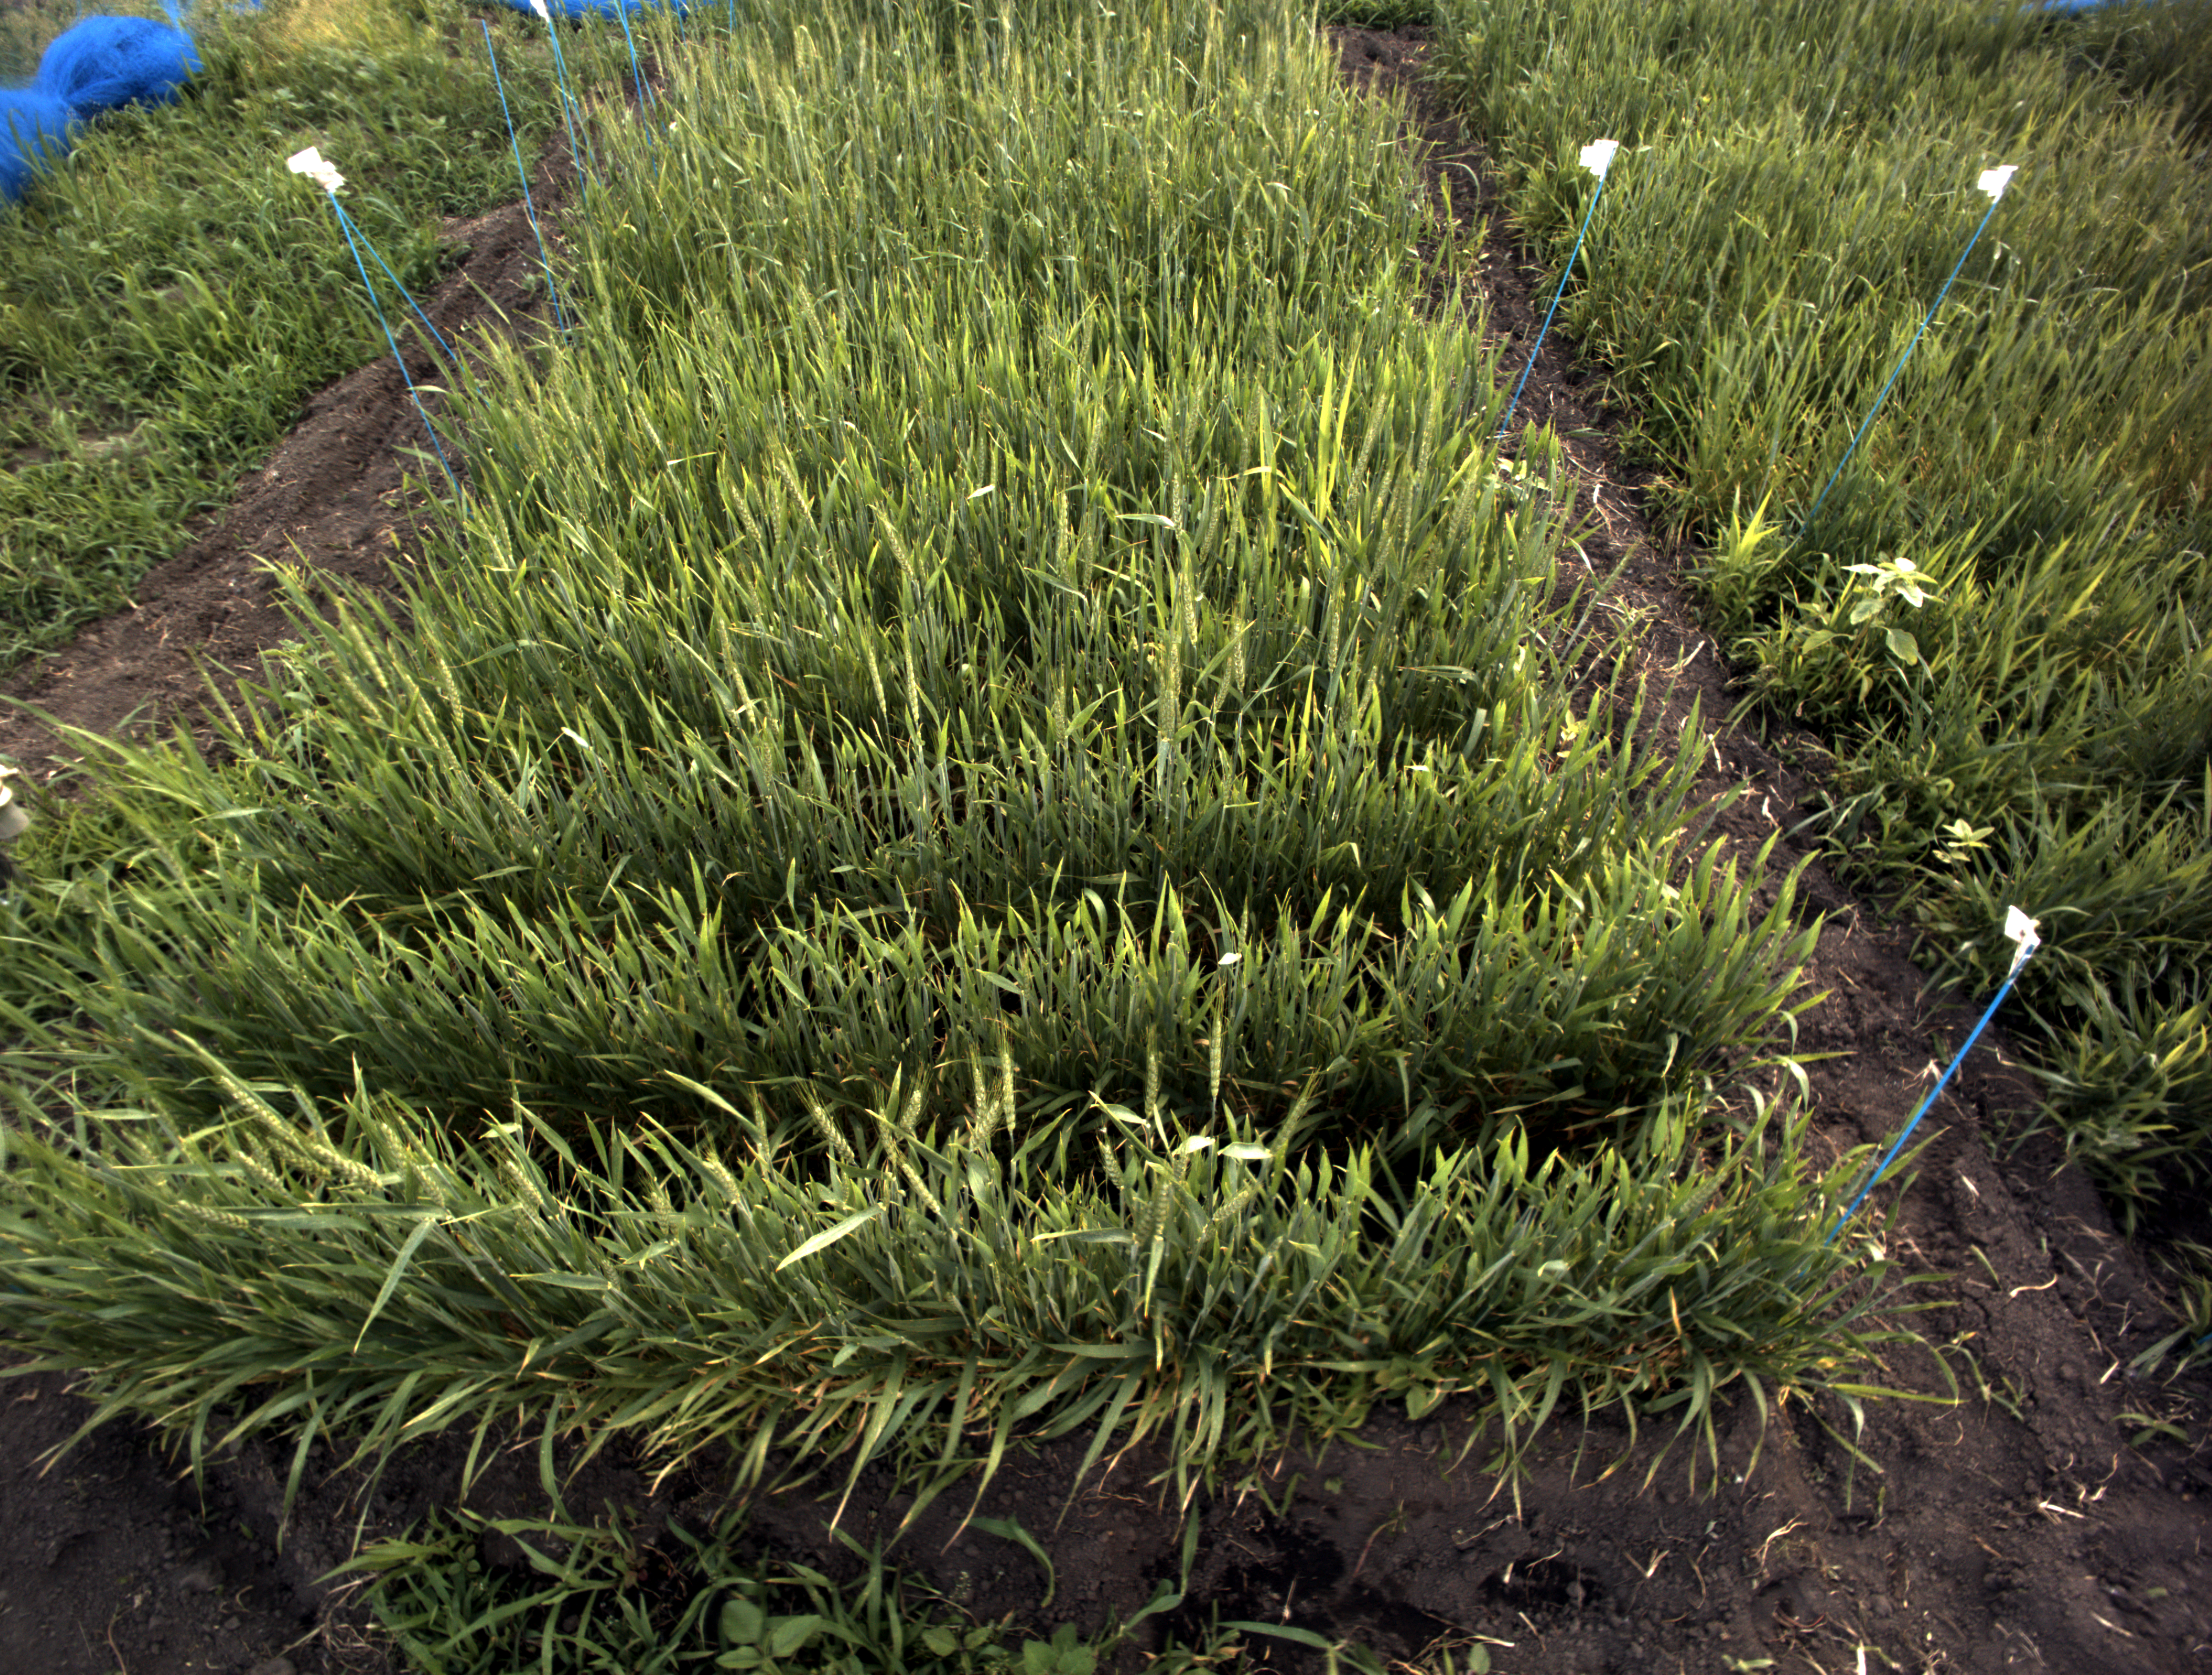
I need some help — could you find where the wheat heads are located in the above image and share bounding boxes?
[1287,140,1293,168]
[777,457,813,524]
[824,225,837,254]
[1247,165,1258,190]
[512,1208,535,1244]
[1360,665,1378,721]
[903,650,920,722]
[994,353,1000,380]
[1400,300,1409,322]
[1083,416,1102,475]
[1075,27,1083,67]
[809,63,819,103]
[786,84,801,127]
[859,38,868,72]
[316,1144,384,1191]
[1334,692,1353,744]
[792,208,804,229]
[1235,908,1249,955]
[334,1289,375,1310]
[774,90,791,131]
[1168,642,1183,699]
[1049,406,1057,437]
[1053,693,1066,743]
[1082,534,1093,591]
[1266,309,1277,365]
[1184,385,1200,448]
[592,96,605,123]
[1222,771,1233,808]
[722,699,738,728]
[1158,671,1167,733]
[1276,6,1284,27]
[504,1158,545,1208]
[1551,664,1570,692]
[1236,437,1249,486]
[618,89,626,110]
[1101,602,1109,639]
[1212,1191,1250,1225]
[978,438,985,484]
[1302,151,1315,186]
[752,482,770,527]
[2145,117,2173,154]
[1263,226,1269,253]
[865,148,878,183]
[1203,76,1208,109]
[705,59,718,96]
[651,40,663,76]
[875,1106,898,1163]
[706,1156,743,1202]
[1512,525,1529,581]
[411,1166,443,1205]
[896,195,907,225]
[678,129,687,155]
[1214,656,1232,710]
[803,144,811,170]
[760,741,773,789]
[645,179,665,214]
[1320,58,1330,100]
[1270,1097,1308,1155]
[1370,470,1392,526]
[490,492,514,557]
[817,55,829,92]
[834,402,841,437]
[556,387,577,435]
[515,394,536,426]
[120,1129,163,1180]
[562,555,574,586]
[663,47,667,70]
[870,43,878,87]
[767,73,775,99]
[950,363,957,395]
[1016,68,1025,109]
[1308,6,1321,57]
[1678,1168,1731,1220]
[1153,1180,1171,1237]
[605,128,621,161]
[2156,227,2180,263]
[149,1095,185,1149]
[1025,76,1034,116]
[638,405,661,447]
[852,777,858,807]
[436,733,463,768]
[713,314,724,368]
[599,1259,622,1289]
[341,670,382,723]
[1039,365,1049,399]
[688,138,698,162]
[1199,505,1223,563]
[1078,314,1092,365]
[882,519,913,582]
[691,11,701,39]
[732,104,751,135]
[801,759,812,795]
[744,45,756,82]
[2105,212,2131,246]
[1164,678,1176,740]
[712,206,730,239]
[516,1197,538,1219]
[549,333,565,390]
[1890,216,1901,239]
[917,557,927,587]
[1346,429,1376,513]
[756,88,769,121]
[584,369,593,421]
[751,1,764,20]
[649,1188,670,1234]
[1392,573,1414,616]
[1415,400,1441,480]
[1714,257,1726,286]
[1173,154,1182,183]
[216,1073,288,1137]
[837,362,844,398]
[907,79,913,111]
[827,14,842,60]
[2010,225,2019,248]
[485,778,528,820]
[1366,84,1376,126]
[1000,1053,1020,1135]
[397,1115,439,1170]
[840,1171,850,1201]
[1473,330,1481,367]
[2067,328,2077,355]
[845,177,857,203]
[593,259,603,284]
[1034,744,1043,770]
[665,41,676,80]
[835,277,848,335]
[1527,534,1562,591]
[730,667,757,725]
[1169,210,1178,238]
[848,200,860,233]
[1133,1201,1156,1244]
[1227,83,1238,115]
[716,615,736,676]
[1395,101,1405,125]
[1146,204,1151,228]
[902,1161,941,1217]
[1342,353,1353,399]
[586,721,600,757]
[538,424,554,467]
[928,207,940,237]
[379,1122,409,1180]
[663,1200,678,1235]
[1022,965,1032,1002]
[243,1130,275,1175]
[1261,65,1277,96]
[1057,685,1065,713]
[478,518,510,580]
[1102,1141,1125,1189]
[1372,393,1387,438]
[1266,1235,1284,1258]
[1585,554,1629,616]
[1145,1050,1159,1119]
[1163,417,1174,467]
[731,485,762,542]
[729,61,740,105]
[760,70,766,102]
[768,491,782,546]
[674,62,684,90]
[405,674,437,724]
[1192,67,1205,109]
[800,210,811,229]
[607,116,630,165]
[1231,625,1247,691]
[972,215,984,241]
[2150,140,2167,164]
[1100,14,1110,47]
[831,556,844,598]
[1541,578,1555,618]
[686,50,698,88]
[1394,475,1413,548]
[999,14,1011,77]
[1045,323,1056,371]
[664,8,674,45]
[813,167,830,200]
[1247,543,1262,599]
[955,44,966,83]
[1447,483,1470,539]
[765,4,773,25]
[1277,209,1285,230]
[750,169,757,193]
[1174,1146,1188,1182]
[1163,143,1169,163]
[415,714,441,749]
[549,551,562,575]
[970,1100,999,1143]
[1308,218,1319,247]
[1245,386,1259,438]
[266,1137,331,1180]
[136,825,187,887]
[812,1104,858,1160]
[348,625,389,686]
[1052,492,1069,570]
[746,580,763,618]
[1062,557,1075,603]
[699,65,712,117]
[1292,79,1302,137]
[752,1108,770,1164]
[987,127,998,149]
[604,294,613,331]
[438,656,465,723]
[1284,77,1295,115]
[1229,504,1240,550]
[1207,1021,1223,1097]
[233,1149,285,1196]
[610,548,625,593]
[818,222,824,244]
[291,1082,326,1133]
[792,28,804,67]
[757,20,776,74]
[1367,536,1394,583]
[1408,538,1441,596]
[202,670,246,740]
[1183,571,1198,647]
[589,46,605,79]
[928,43,936,81]
[177,1198,248,1230]
[972,1068,988,1127]
[1183,206,1189,248]
[990,451,997,484]
[573,488,587,518]
[763,697,779,737]
[1460,466,1479,540]
[514,427,541,478]
[964,783,974,809]
[504,736,522,765]
[1031,164,1042,195]
[1297,389,1302,409]
[1135,35,1144,68]
[494,354,521,397]
[865,647,887,713]
[1376,476,1401,558]
[1172,470,1184,540]
[529,425,545,457]
[592,427,606,464]
[708,36,719,84]
[1147,177,1160,211]
[1328,609,1339,675]
[911,88,923,122]
[868,126,876,152]
[1332,45,1342,78]
[852,101,860,138]
[578,93,590,136]
[1208,80,1212,109]
[499,751,514,787]
[798,286,824,337]
[686,96,699,131]
[2024,219,2035,239]
[1893,190,1903,215]
[1178,79,1186,118]
[623,399,634,425]
[483,592,503,625]
[518,356,541,404]
[1162,21,1169,69]
[901,1087,925,1131]
[880,1176,892,1207]
[1096,40,1105,93]
[1282,9,1292,59]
